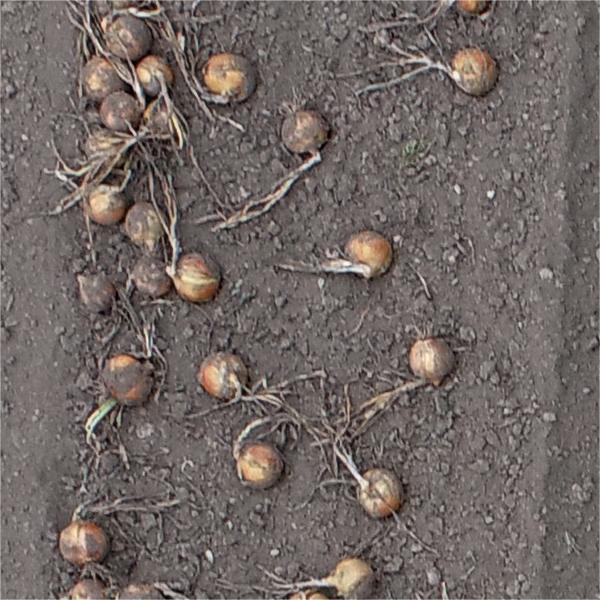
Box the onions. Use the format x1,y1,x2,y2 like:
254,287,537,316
451,44,496,95
82,58,121,99
355,467,402,515
146,101,185,145
133,56,170,92
88,184,129,224
74,271,111,311
101,353,151,403
105,13,150,57
123,205,163,246
203,53,251,100
173,250,219,301
68,574,108,600
99,92,139,131
284,106,327,149
57,519,108,564
345,231,389,275
195,351,243,397
290,590,329,600
236,440,281,487
408,338,452,380
454,0,490,18
331,556,371,593
84,124,122,161
127,254,170,297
